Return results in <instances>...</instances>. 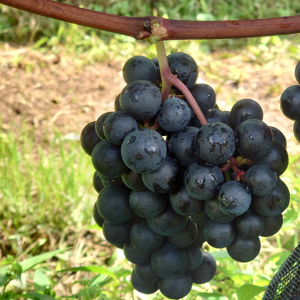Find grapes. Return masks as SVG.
<instances>
[{
    "label": "grapes",
    "mask_w": 300,
    "mask_h": 300,
    "mask_svg": "<svg viewBox=\"0 0 300 300\" xmlns=\"http://www.w3.org/2000/svg\"><path fill=\"white\" fill-rule=\"evenodd\" d=\"M167 61L168 99L162 102L158 57L133 56L115 111L88 123L80 143L95 168L93 218L135 264L133 287L180 299L216 273L205 242L248 262L259 253V236L281 229L290 191L279 176L289 153L256 101L221 111L215 90L195 83L189 54L175 51Z\"/></svg>",
    "instance_id": "1"
}]
</instances>
